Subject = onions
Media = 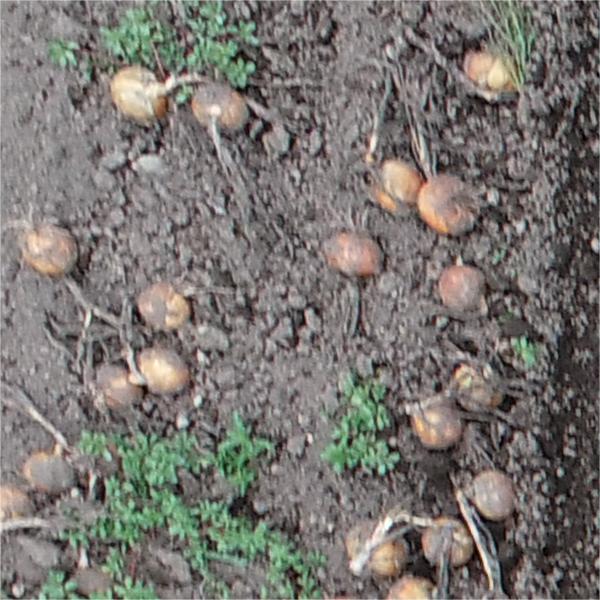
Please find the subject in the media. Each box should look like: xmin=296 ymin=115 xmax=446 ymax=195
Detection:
xmin=422 ymin=523 xmax=471 ymax=564
xmin=95 ymin=363 xmax=143 ymax=413
xmin=452 ymin=361 xmax=502 ymax=411
xmin=21 ymin=223 xmax=76 ymax=278
xmin=322 ymin=228 xmax=382 ymax=278
xmin=192 ymin=80 xmax=247 ymax=127
xmin=386 ymin=574 xmax=432 ymax=599
xmin=408 ymin=395 xmax=462 ymax=449
xmin=467 ymin=471 xmax=514 ymax=519
xmin=0 ymin=482 xmax=30 ymax=521
xmin=135 ymin=282 xmax=191 ymax=330
xmin=463 ymin=50 xmax=514 ymax=92
xmin=348 ymin=518 xmax=412 ymax=581
xmin=434 ymin=264 xmax=485 ymax=316
xmin=24 ymin=451 xmax=74 ymax=494
xmin=111 ymin=66 xmax=164 ymax=123
xmin=417 ymin=175 xmax=478 ymax=234
xmin=136 ymin=344 xmax=187 ymax=392
xmin=377 ymin=161 xmax=420 ymax=208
